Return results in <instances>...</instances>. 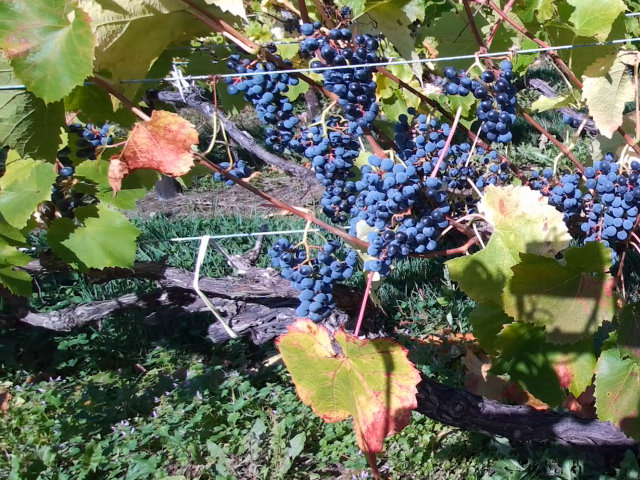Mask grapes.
Masks as SVG:
<instances>
[{"label": "grapes", "mask_w": 640, "mask_h": 480, "mask_svg": "<svg viewBox=\"0 0 640 480\" xmlns=\"http://www.w3.org/2000/svg\"><path fill=\"white\" fill-rule=\"evenodd\" d=\"M372 72L377 73V68L345 69L327 72H313L323 74L322 87L336 94L339 98L337 104L343 106L344 117L349 122L346 134L339 131H330L328 138H323L324 126H302L300 134L295 136L291 129L301 123L298 116L291 112L293 106L288 95H281L279 91H285L287 85L296 86L300 79L297 75H255L244 77V80L223 79L227 85V93L230 96L237 95L240 91L246 94L243 99L258 111L257 118L264 124L276 125L280 130L276 132L274 126L264 129L265 144L272 146L276 153H282L285 146L292 151L303 152L316 171V178L322 182L325 191L322 193L320 204L323 213L330 218L332 223H345L347 216L335 214L334 207L338 206L340 212L350 213L353 217L350 221V229L347 234L357 237L358 223L366 221L369 228L384 230L390 225V215H395L399 210L405 211L409 207L413 214L409 217L400 216L395 220L398 227L396 233L391 230L370 231L367 240L370 246L366 249L368 257L363 261V269L366 272H377L380 277L390 275L389 265L396 254L405 258L409 253L424 254L426 251H435L437 241L434 239L440 235V228L449 226L445 216L451 210V204L447 194L440 191L443 183L448 189L470 190L472 184L467 178H472L476 169L474 167L458 166L468 160L471 145L466 142L461 144H449L444 153L455 155L451 160H443L438 166L440 171L449 167L447 175L440 177L427 176L421 186V179L416 172L424 175L433 173L442 155L445 140H438L439 131H431L427 142L423 135H418L414 140L408 130V116L401 114L399 121L394 126V141L399 152L398 158L403 164H396L392 159H381L377 155H370L368 163L360 169L362 180L354 179L356 172L349 170L353 167L354 159L361 155L360 143L353 137H362L364 129L371 127V122L379 113L376 103L375 90L377 84L372 81ZM436 152V156L430 161L423 160L422 165L416 164L420 158ZM378 167L380 171L387 173L385 179L372 170Z\"/></svg>", "instance_id": "1"}, {"label": "grapes", "mask_w": 640, "mask_h": 480, "mask_svg": "<svg viewBox=\"0 0 640 480\" xmlns=\"http://www.w3.org/2000/svg\"><path fill=\"white\" fill-rule=\"evenodd\" d=\"M341 247L339 240H329L323 246L315 258V263L323 266L319 270L320 279L312 275V266L304 263L307 257L305 249H297L294 244H289L285 238H278L267 249V255L271 259L273 268H281L280 275L290 280L295 289L302 291L299 296L301 303L295 308L298 317L309 316L314 324H322L324 318H329L332 310L337 307L334 298V284L338 279L345 281L353 275L357 264V253L354 249H348L344 257V263L336 260L333 251Z\"/></svg>", "instance_id": "2"}, {"label": "grapes", "mask_w": 640, "mask_h": 480, "mask_svg": "<svg viewBox=\"0 0 640 480\" xmlns=\"http://www.w3.org/2000/svg\"><path fill=\"white\" fill-rule=\"evenodd\" d=\"M630 169L635 173L629 177L617 175L619 165L614 163L612 152L605 154V160L595 161L593 167L584 169L585 186L595 189L601 201L590 204L587 222L580 225V230L587 232L583 245L598 240L610 248L611 238L629 237L640 212V163L632 161Z\"/></svg>", "instance_id": "3"}, {"label": "grapes", "mask_w": 640, "mask_h": 480, "mask_svg": "<svg viewBox=\"0 0 640 480\" xmlns=\"http://www.w3.org/2000/svg\"><path fill=\"white\" fill-rule=\"evenodd\" d=\"M498 66L503 70L498 74V79L493 85V89L497 92L495 101L498 103L497 109H492L494 103L492 97L488 95V89L482 86L480 81H473L468 77V72L461 68L458 72L452 66H446L442 75L449 82L445 86V90L450 95H461L467 97L469 93H473L476 99H479L480 108L476 110L477 118L485 121L481 125V131L487 133V138L495 143H509L512 140V132L508 129V125H514L517 122L515 115L517 87L514 83H510L514 77L512 64L506 60H500Z\"/></svg>", "instance_id": "4"}, {"label": "grapes", "mask_w": 640, "mask_h": 480, "mask_svg": "<svg viewBox=\"0 0 640 480\" xmlns=\"http://www.w3.org/2000/svg\"><path fill=\"white\" fill-rule=\"evenodd\" d=\"M322 27L320 20H315L313 23H301L299 25V31L306 38L300 43V49L302 52L310 53L317 48L320 51V57L325 60L327 64L342 65V64H357V63H378L380 57L374 50L378 48V37L373 36L370 33L363 35H356L354 38L356 51H353L351 47H343L341 52L335 47L329 45L327 37L324 35L313 37L314 29Z\"/></svg>", "instance_id": "5"}, {"label": "grapes", "mask_w": 640, "mask_h": 480, "mask_svg": "<svg viewBox=\"0 0 640 480\" xmlns=\"http://www.w3.org/2000/svg\"><path fill=\"white\" fill-rule=\"evenodd\" d=\"M582 178L580 173L570 174L564 172L560 178V186H554L551 189V196L548 199V203L556 208L558 212L563 215L562 221L567 223L571 216L578 213L579 208L583 205V192L579 189V180ZM583 199L585 201H591L593 195L587 192Z\"/></svg>", "instance_id": "6"}, {"label": "grapes", "mask_w": 640, "mask_h": 480, "mask_svg": "<svg viewBox=\"0 0 640 480\" xmlns=\"http://www.w3.org/2000/svg\"><path fill=\"white\" fill-rule=\"evenodd\" d=\"M68 129L71 133H77L78 138L75 141V146L80 148L76 155L80 158H89L90 160H94L96 158L95 147L97 145H105L106 144V136L111 130V125L106 124L102 125L98 135L95 134L93 130V126L91 123H88L86 126V130L82 129V125L79 123L69 124Z\"/></svg>", "instance_id": "7"}, {"label": "grapes", "mask_w": 640, "mask_h": 480, "mask_svg": "<svg viewBox=\"0 0 640 480\" xmlns=\"http://www.w3.org/2000/svg\"><path fill=\"white\" fill-rule=\"evenodd\" d=\"M229 61L227 62V67L231 70H234L237 73L249 72L253 70H277L270 62H266L264 68L261 69L260 63L255 64V69H246L245 66H249L251 61L249 59L242 58L237 53H231L229 55Z\"/></svg>", "instance_id": "8"}, {"label": "grapes", "mask_w": 640, "mask_h": 480, "mask_svg": "<svg viewBox=\"0 0 640 480\" xmlns=\"http://www.w3.org/2000/svg\"><path fill=\"white\" fill-rule=\"evenodd\" d=\"M219 165L223 169H229L231 167V164L229 162L224 161H221ZM228 172L237 178H248L252 175V170L246 167V163L243 160L235 161L232 164V168L229 169Z\"/></svg>", "instance_id": "9"}, {"label": "grapes", "mask_w": 640, "mask_h": 480, "mask_svg": "<svg viewBox=\"0 0 640 480\" xmlns=\"http://www.w3.org/2000/svg\"><path fill=\"white\" fill-rule=\"evenodd\" d=\"M329 38L333 41H338L339 39L350 40L352 38V31L348 28H331L329 31Z\"/></svg>", "instance_id": "10"}, {"label": "grapes", "mask_w": 640, "mask_h": 480, "mask_svg": "<svg viewBox=\"0 0 640 480\" xmlns=\"http://www.w3.org/2000/svg\"><path fill=\"white\" fill-rule=\"evenodd\" d=\"M496 183H497V177L493 174H490L487 178H485L483 175H480L474 179V186L477 189H482L486 185H490V184L495 185Z\"/></svg>", "instance_id": "11"}, {"label": "grapes", "mask_w": 640, "mask_h": 480, "mask_svg": "<svg viewBox=\"0 0 640 480\" xmlns=\"http://www.w3.org/2000/svg\"><path fill=\"white\" fill-rule=\"evenodd\" d=\"M417 122H418V130L420 132H426L429 129V126L431 128H435L438 126V122L436 119H431L429 121V126L427 125V116L425 114H419L417 116Z\"/></svg>", "instance_id": "12"}, {"label": "grapes", "mask_w": 640, "mask_h": 480, "mask_svg": "<svg viewBox=\"0 0 640 480\" xmlns=\"http://www.w3.org/2000/svg\"><path fill=\"white\" fill-rule=\"evenodd\" d=\"M506 169L507 165L504 162H499L497 165L491 164L489 166V170L492 173H498L501 170V172L498 174V179L502 182H505L508 179V174L505 172Z\"/></svg>", "instance_id": "13"}, {"label": "grapes", "mask_w": 640, "mask_h": 480, "mask_svg": "<svg viewBox=\"0 0 640 480\" xmlns=\"http://www.w3.org/2000/svg\"><path fill=\"white\" fill-rule=\"evenodd\" d=\"M485 153H486V150L482 146H479V147L476 148V154L478 156H483L481 158V163L483 165H487L490 162V159L496 160L498 158L497 157L498 153L495 150L489 151L488 152V156L484 155Z\"/></svg>", "instance_id": "14"}]
</instances>
